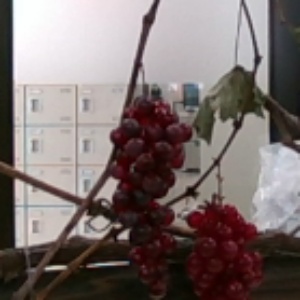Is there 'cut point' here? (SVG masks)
<instances>
[{"instance_id": "obj_1", "label": "cut point", "mask_w": 300, "mask_h": 300, "mask_svg": "<svg viewBox=\"0 0 300 300\" xmlns=\"http://www.w3.org/2000/svg\"><path fill=\"white\" fill-rule=\"evenodd\" d=\"M138 71H142V91L143 95L148 96V85L146 84L145 80V69L143 61L140 62Z\"/></svg>"}]
</instances>
